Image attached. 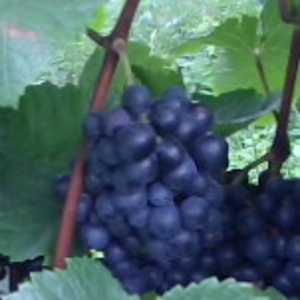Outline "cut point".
Segmentation results:
<instances>
[{
    "label": "cut point",
    "mask_w": 300,
    "mask_h": 300,
    "mask_svg": "<svg viewBox=\"0 0 300 300\" xmlns=\"http://www.w3.org/2000/svg\"><path fill=\"white\" fill-rule=\"evenodd\" d=\"M115 49L120 54V58L125 66V76H126V83L127 85L131 84H140V79H138L131 69V65L129 59L127 57V51L125 48V42L123 39H116L114 40Z\"/></svg>",
    "instance_id": "1"
},
{
    "label": "cut point",
    "mask_w": 300,
    "mask_h": 300,
    "mask_svg": "<svg viewBox=\"0 0 300 300\" xmlns=\"http://www.w3.org/2000/svg\"><path fill=\"white\" fill-rule=\"evenodd\" d=\"M269 154H265L262 157H260V159H256L255 161L249 163L248 165L244 166V170L247 172L251 171L253 168H256L258 165H260L261 163L265 162L266 159H268Z\"/></svg>",
    "instance_id": "2"
}]
</instances>
